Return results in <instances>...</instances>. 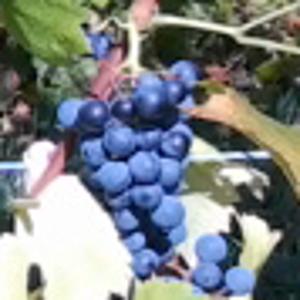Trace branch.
<instances>
[{"mask_svg": "<svg viewBox=\"0 0 300 300\" xmlns=\"http://www.w3.org/2000/svg\"><path fill=\"white\" fill-rule=\"evenodd\" d=\"M78 142L79 132L77 130H68L61 136L42 177L31 188L33 197H38L45 186L52 183L58 176L67 173L66 167L71 162L72 153Z\"/></svg>", "mask_w": 300, "mask_h": 300, "instance_id": "obj_1", "label": "branch"}, {"mask_svg": "<svg viewBox=\"0 0 300 300\" xmlns=\"http://www.w3.org/2000/svg\"><path fill=\"white\" fill-rule=\"evenodd\" d=\"M127 39V29L121 28L118 37L112 44L111 54L96 74L91 84L84 91V96L86 98H103L106 95L113 72L120 67L124 61Z\"/></svg>", "mask_w": 300, "mask_h": 300, "instance_id": "obj_2", "label": "branch"}, {"mask_svg": "<svg viewBox=\"0 0 300 300\" xmlns=\"http://www.w3.org/2000/svg\"><path fill=\"white\" fill-rule=\"evenodd\" d=\"M162 0H130L126 5L128 12L137 15V25L140 31L146 30L153 22Z\"/></svg>", "mask_w": 300, "mask_h": 300, "instance_id": "obj_3", "label": "branch"}]
</instances>
